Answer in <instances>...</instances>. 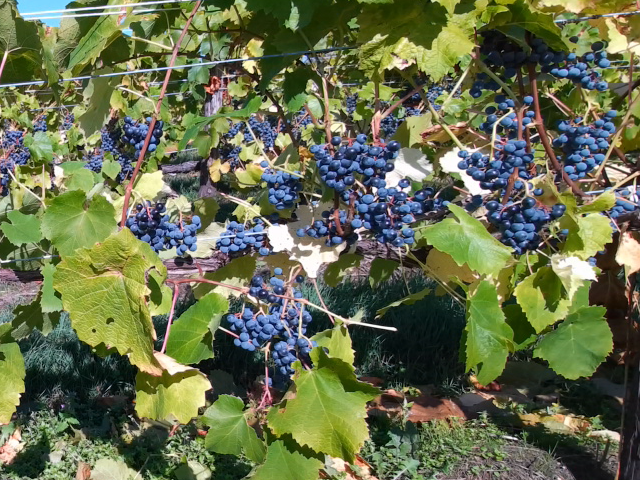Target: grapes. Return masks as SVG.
<instances>
[{
	"label": "grapes",
	"mask_w": 640,
	"mask_h": 480,
	"mask_svg": "<svg viewBox=\"0 0 640 480\" xmlns=\"http://www.w3.org/2000/svg\"><path fill=\"white\" fill-rule=\"evenodd\" d=\"M368 136L359 133L355 141L350 144H342L340 136L332 137L333 146H340L336 153L329 154L324 145L314 144L309 147V153L314 155L315 166L319 168V176L322 182H326L329 189H334L341 193V199L347 206L351 205L350 197L355 199L354 205L358 214L354 215L351 228L373 230L375 225L379 228L377 242L392 243L397 248L404 244L411 246L415 244V231L412 227L403 225L410 224L413 216L424 215L433 210H442L450 204L449 200L436 198L426 200L427 196H433L435 190L431 186L424 187L421 191L414 193V200L409 201L405 192H399L395 187H387L386 173L394 170L393 163H387L388 159H395L399 156L401 143L396 140H389L384 147L370 146L365 144ZM355 172L357 175H365L363 185L377 189L376 195L379 198L394 197L393 205L389 207V213L397 215L388 216V203H377L373 194L365 195L362 191L358 193L354 189H346L355 183Z\"/></svg>",
	"instance_id": "1"
},
{
	"label": "grapes",
	"mask_w": 640,
	"mask_h": 480,
	"mask_svg": "<svg viewBox=\"0 0 640 480\" xmlns=\"http://www.w3.org/2000/svg\"><path fill=\"white\" fill-rule=\"evenodd\" d=\"M250 282L251 287L248 289V294L252 298L258 296L260 299L278 305H273L269 308L270 315H258L255 317L253 309L249 306L243 308L242 318L237 314H227L225 322L230 325V330L237 332L240 329L239 338H234L232 344L242 350L247 349L249 352H253L262 346V341H271L274 336H279L282 340L273 345L271 358L283 376L294 375L295 370L291 367V364L295 363L297 352L288 350V348L297 346L301 350L300 355L304 358H309L312 351L311 347L319 346L317 341L297 338L299 328L298 311L301 308V304L294 303L286 306L283 325L280 318L285 300L283 297H277L276 295H284L286 293L284 281L277 277L269 279L272 291L275 294H269V291L262 287L264 280L261 275H253Z\"/></svg>",
	"instance_id": "2"
},
{
	"label": "grapes",
	"mask_w": 640,
	"mask_h": 480,
	"mask_svg": "<svg viewBox=\"0 0 640 480\" xmlns=\"http://www.w3.org/2000/svg\"><path fill=\"white\" fill-rule=\"evenodd\" d=\"M516 114H509L500 125L496 126V132L502 133L504 129L512 128L508 132V141L506 145L495 144L496 149L493 159L483 156L482 152H473L469 155L467 150H460L456 156L461 160L457 163L459 171H466L467 176H471L474 181H479V187L482 190H490L495 192L501 189L500 196L505 197L508 189L507 180L511 177L514 167H519L520 178L531 180L534 175L527 171L528 163L534 162L535 149H531L530 153L525 150V141H516L518 131V121Z\"/></svg>",
	"instance_id": "3"
},
{
	"label": "grapes",
	"mask_w": 640,
	"mask_h": 480,
	"mask_svg": "<svg viewBox=\"0 0 640 480\" xmlns=\"http://www.w3.org/2000/svg\"><path fill=\"white\" fill-rule=\"evenodd\" d=\"M617 116L615 109L607 110L602 119H596L593 127L589 125H579L583 120L581 115L575 116L571 123L569 120H561L557 123V130L562 132L558 138L552 140V145L559 148L562 144L564 162L563 171L573 180L578 181L585 178L587 173L592 174L604 160L603 153H593L600 149H607L609 141L606 139L611 133L617 131L616 124L612 118Z\"/></svg>",
	"instance_id": "4"
},
{
	"label": "grapes",
	"mask_w": 640,
	"mask_h": 480,
	"mask_svg": "<svg viewBox=\"0 0 640 480\" xmlns=\"http://www.w3.org/2000/svg\"><path fill=\"white\" fill-rule=\"evenodd\" d=\"M515 200L509 196L506 200L507 205H512ZM488 210L487 219L493 224H499V231L502 233L501 242L507 247H511L516 255H522L523 249H526L530 242L536 238V234L542 229V225L549 221H555L563 216L567 210V205L561 202H554L552 210L536 206V199L527 196L522 201V207L514 204L508 207L506 211L502 209L501 202L497 199L488 201L485 204Z\"/></svg>",
	"instance_id": "5"
},
{
	"label": "grapes",
	"mask_w": 640,
	"mask_h": 480,
	"mask_svg": "<svg viewBox=\"0 0 640 480\" xmlns=\"http://www.w3.org/2000/svg\"><path fill=\"white\" fill-rule=\"evenodd\" d=\"M146 203L149 205L151 218L144 206L137 204L138 212L134 217L126 220V226L137 238L147 242L152 251H161L164 247L171 250L175 247L177 256H183L185 252L197 251V235L202 224L200 215H193L191 224H186L185 221H182L181 225L169 223L168 215H160L166 212L163 202H158L154 208H152V201L146 200Z\"/></svg>",
	"instance_id": "6"
},
{
	"label": "grapes",
	"mask_w": 640,
	"mask_h": 480,
	"mask_svg": "<svg viewBox=\"0 0 640 480\" xmlns=\"http://www.w3.org/2000/svg\"><path fill=\"white\" fill-rule=\"evenodd\" d=\"M533 46L529 55V61L531 63H537L542 67L544 73H549L558 79H571L575 84H581L583 89L605 91L608 88V83L605 80H599L593 82V76L587 74V63H593L600 69H608L611 66V62L607 59V53L600 51L604 47L602 41H596L591 45V49L594 52L585 53L582 57L584 62H577L571 64L569 69L567 67H557L556 65H549L552 63L572 62L576 59L574 52L566 53L565 51L555 52L553 49L544 44L542 38L534 39L531 42Z\"/></svg>",
	"instance_id": "7"
},
{
	"label": "grapes",
	"mask_w": 640,
	"mask_h": 480,
	"mask_svg": "<svg viewBox=\"0 0 640 480\" xmlns=\"http://www.w3.org/2000/svg\"><path fill=\"white\" fill-rule=\"evenodd\" d=\"M481 36L485 39L480 53L488 56L483 59L484 64L489 66L491 63H503L506 69L504 76L512 78L516 74V64H520L525 58L523 48L514 39L499 31H483Z\"/></svg>",
	"instance_id": "8"
},
{
	"label": "grapes",
	"mask_w": 640,
	"mask_h": 480,
	"mask_svg": "<svg viewBox=\"0 0 640 480\" xmlns=\"http://www.w3.org/2000/svg\"><path fill=\"white\" fill-rule=\"evenodd\" d=\"M294 173L301 175L299 170H294ZM298 175L266 169L261 174V179L268 183L267 202L278 210H291L294 202L298 200V193L302 190V184L296 181L301 180Z\"/></svg>",
	"instance_id": "9"
},
{
	"label": "grapes",
	"mask_w": 640,
	"mask_h": 480,
	"mask_svg": "<svg viewBox=\"0 0 640 480\" xmlns=\"http://www.w3.org/2000/svg\"><path fill=\"white\" fill-rule=\"evenodd\" d=\"M252 222L256 225L246 229L245 223L240 222L238 224L237 221H230L225 225V231H222L221 234L227 233H238V238H233L232 243L231 239H219L216 242V247L219 248L224 253H235L239 251H243L248 245H252L255 250L258 251V254L264 258H268L269 255L275 256L276 252L272 249H269L267 246H264V235L257 236H244V231H255V230H265L267 228V224L261 218L255 217L252 219Z\"/></svg>",
	"instance_id": "10"
},
{
	"label": "grapes",
	"mask_w": 640,
	"mask_h": 480,
	"mask_svg": "<svg viewBox=\"0 0 640 480\" xmlns=\"http://www.w3.org/2000/svg\"><path fill=\"white\" fill-rule=\"evenodd\" d=\"M337 226L334 221L330 222V227L322 220H316L312 225H305L304 228H298L296 230V236L298 238L313 237L314 239H321L324 236H329L325 239V245L328 248H333L344 242V237L340 234H336Z\"/></svg>",
	"instance_id": "11"
},
{
	"label": "grapes",
	"mask_w": 640,
	"mask_h": 480,
	"mask_svg": "<svg viewBox=\"0 0 640 480\" xmlns=\"http://www.w3.org/2000/svg\"><path fill=\"white\" fill-rule=\"evenodd\" d=\"M123 122L125 125L123 126L124 136L122 137V142L124 144H128L130 146H134L137 150L134 154V158L138 159L140 156V151L143 146V142L145 140V135L147 131L146 123H139L137 120H133L129 116H125L123 118Z\"/></svg>",
	"instance_id": "12"
},
{
	"label": "grapes",
	"mask_w": 640,
	"mask_h": 480,
	"mask_svg": "<svg viewBox=\"0 0 640 480\" xmlns=\"http://www.w3.org/2000/svg\"><path fill=\"white\" fill-rule=\"evenodd\" d=\"M494 102L498 104L497 107L496 106L486 107L485 113L489 116L485 119V122H481L479 124V131L483 132L485 135L492 134V124L498 120V115L493 113H495L497 109L500 111H506L508 108H514V105H515L512 99H507L506 95L495 96Z\"/></svg>",
	"instance_id": "13"
},
{
	"label": "grapes",
	"mask_w": 640,
	"mask_h": 480,
	"mask_svg": "<svg viewBox=\"0 0 640 480\" xmlns=\"http://www.w3.org/2000/svg\"><path fill=\"white\" fill-rule=\"evenodd\" d=\"M476 78L478 80H486L488 78V75L482 72V73H478L476 75ZM478 80H475L473 82V87L469 89V95L473 98H480L482 96V91L484 89H490L493 92H497L501 89V86L497 82H495L492 78L489 80V82H484V83Z\"/></svg>",
	"instance_id": "14"
},
{
	"label": "grapes",
	"mask_w": 640,
	"mask_h": 480,
	"mask_svg": "<svg viewBox=\"0 0 640 480\" xmlns=\"http://www.w3.org/2000/svg\"><path fill=\"white\" fill-rule=\"evenodd\" d=\"M637 210V206L633 203H629L627 200L618 198L615 204L608 210L609 217L611 219H617L619 215H627Z\"/></svg>",
	"instance_id": "15"
},
{
	"label": "grapes",
	"mask_w": 640,
	"mask_h": 480,
	"mask_svg": "<svg viewBox=\"0 0 640 480\" xmlns=\"http://www.w3.org/2000/svg\"><path fill=\"white\" fill-rule=\"evenodd\" d=\"M154 127L155 129L153 130V135L150 137V142L147 148L149 152H154L156 150V147L160 144L159 138L163 136V131L161 130L163 122L161 120H156Z\"/></svg>",
	"instance_id": "16"
},
{
	"label": "grapes",
	"mask_w": 640,
	"mask_h": 480,
	"mask_svg": "<svg viewBox=\"0 0 640 480\" xmlns=\"http://www.w3.org/2000/svg\"><path fill=\"white\" fill-rule=\"evenodd\" d=\"M470 203H467L465 205V211L466 212H473L476 211L478 209V207H480L483 204V200H482V196L481 195H474L471 198Z\"/></svg>",
	"instance_id": "17"
},
{
	"label": "grapes",
	"mask_w": 640,
	"mask_h": 480,
	"mask_svg": "<svg viewBox=\"0 0 640 480\" xmlns=\"http://www.w3.org/2000/svg\"><path fill=\"white\" fill-rule=\"evenodd\" d=\"M312 322H313V316L310 314L308 309H305L303 311V318H302V330H301L302 334L307 333V325L311 324Z\"/></svg>",
	"instance_id": "18"
}]
</instances>
